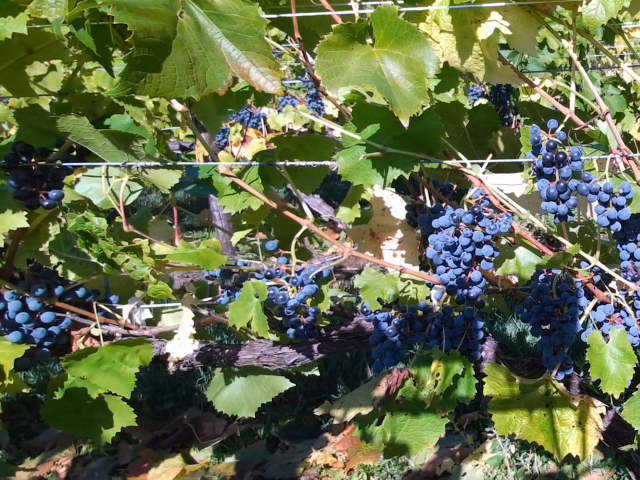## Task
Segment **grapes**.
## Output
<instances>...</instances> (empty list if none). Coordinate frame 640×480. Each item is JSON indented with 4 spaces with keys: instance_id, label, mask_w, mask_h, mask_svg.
<instances>
[{
    "instance_id": "obj_1",
    "label": "grapes",
    "mask_w": 640,
    "mask_h": 480,
    "mask_svg": "<svg viewBox=\"0 0 640 480\" xmlns=\"http://www.w3.org/2000/svg\"><path fill=\"white\" fill-rule=\"evenodd\" d=\"M490 206L491 202L487 197L479 201L478 205H473L470 211L455 209L451 205L443 208L441 203H434L431 216H417L422 234H430L441 228L437 234L428 237L430 248L426 250V255L429 260H433L435 266L432 276L441 281V286H447L450 295H457V304L464 303L467 307L484 306L480 295L481 288L486 285V280L479 271H474L470 281L465 282L464 273L471 266L472 254L482 257L480 267L484 272L491 271L494 260L500 257L499 249L493 245L492 236L509 232L510 223L513 222L511 213H502L499 219L485 216L482 207ZM461 221L465 225L482 228L474 231L472 227L461 226L462 233L458 237H451V231Z\"/></svg>"
},
{
    "instance_id": "obj_2",
    "label": "grapes",
    "mask_w": 640,
    "mask_h": 480,
    "mask_svg": "<svg viewBox=\"0 0 640 480\" xmlns=\"http://www.w3.org/2000/svg\"><path fill=\"white\" fill-rule=\"evenodd\" d=\"M425 314L424 319L430 324V332L427 339V349L431 350L434 346H438V350L442 351L444 347V329H445V352L449 353L452 349H457L460 338L465 330V321H471L469 329V337L472 340H462L460 349L469 348L468 357L472 361H477L481 357L480 340L484 337L482 330L484 321L480 317H475L472 309H465L462 315L449 316L452 313L451 307H444L441 313H433L430 305L426 301L418 303L415 306H408L406 303L400 305V313L404 314L403 318H393V314L389 310L374 309L370 303L363 302L359 306V312L363 318L373 324V331L370 334V341L374 344L372 355L376 360L373 363V369L377 373L399 364L401 354L405 350V343H424L426 333L423 332V323L418 318H414L411 322V332L407 333V323L409 317L416 312Z\"/></svg>"
},
{
    "instance_id": "obj_3",
    "label": "grapes",
    "mask_w": 640,
    "mask_h": 480,
    "mask_svg": "<svg viewBox=\"0 0 640 480\" xmlns=\"http://www.w3.org/2000/svg\"><path fill=\"white\" fill-rule=\"evenodd\" d=\"M552 275L547 273H537L530 282L531 297L524 301L523 305H518L515 309L517 314H521L520 321L530 324L529 334L535 338H540L538 349L542 354V365L549 372H554L559 362L561 366L554 374L556 380H562L565 375L571 376L574 372V363L569 355L564 351L553 353L555 345L561 344L564 348L571 346L575 336L584 329L583 322L579 320L584 315L582 306L589 307L591 300L584 296L586 291L582 289L583 283L576 281L573 286L574 296L568 291L572 284L570 277H566L563 284L559 286L560 297L552 298L550 285L555 276L560 273L559 268L551 269ZM568 302L567 312L561 314L558 319L552 317L554 309L561 308Z\"/></svg>"
},
{
    "instance_id": "obj_4",
    "label": "grapes",
    "mask_w": 640,
    "mask_h": 480,
    "mask_svg": "<svg viewBox=\"0 0 640 480\" xmlns=\"http://www.w3.org/2000/svg\"><path fill=\"white\" fill-rule=\"evenodd\" d=\"M541 128L538 125L530 127V143L532 150L526 154V159L530 163H534L536 169H541L543 175L553 177L556 169H559V177L564 180L558 182L550 181L547 178H539L536 181V188L540 197L544 200L541 203V209L548 214H556L553 217L555 224H560L564 220L572 222L574 215L570 211L578 205V199L571 191H577L580 196H586L588 203L598 201L599 203H607L610 200V194L614 192L612 183H604L602 189L597 182V177L588 171H583V161L581 160L582 149L573 146L570 150V158L565 152L551 153L558 149L555 140H547L545 147H542L543 137L540 135Z\"/></svg>"
},
{
    "instance_id": "obj_5",
    "label": "grapes",
    "mask_w": 640,
    "mask_h": 480,
    "mask_svg": "<svg viewBox=\"0 0 640 480\" xmlns=\"http://www.w3.org/2000/svg\"><path fill=\"white\" fill-rule=\"evenodd\" d=\"M33 296L18 295L7 291L0 302V333L6 334L13 343L34 344L41 347L39 357L48 361L52 357L51 348L54 339L69 330L72 321L68 317H59L53 311H41L39 299L47 294L43 284H35L31 288Z\"/></svg>"
},
{
    "instance_id": "obj_6",
    "label": "grapes",
    "mask_w": 640,
    "mask_h": 480,
    "mask_svg": "<svg viewBox=\"0 0 640 480\" xmlns=\"http://www.w3.org/2000/svg\"><path fill=\"white\" fill-rule=\"evenodd\" d=\"M318 270L315 264H309L305 268L296 270L294 276L288 277L284 274L282 269H265L259 268L258 273H250L249 277L258 279L261 282H270L272 279H280L288 282L293 287H303L302 291L297 292L294 297H290L286 292H280L277 286H270L268 288V297L276 304L283 305L284 318L282 324L285 327V336L289 339L299 338L300 342L308 341V338H315L320 336L318 329L313 328L314 323L317 322V315L320 313L319 307L309 306L306 308L305 318L308 321H299L297 308L304 305V301L309 296H314L319 292V285L312 284V279L309 278Z\"/></svg>"
},
{
    "instance_id": "obj_7",
    "label": "grapes",
    "mask_w": 640,
    "mask_h": 480,
    "mask_svg": "<svg viewBox=\"0 0 640 480\" xmlns=\"http://www.w3.org/2000/svg\"><path fill=\"white\" fill-rule=\"evenodd\" d=\"M622 193L612 196V203L617 208L607 209L604 204L595 206L596 224L609 228L613 238L618 240L617 249L621 262V276L629 282L637 283L640 268V247L636 243L640 239V213L631 214L627 206L629 199L634 197V188L628 181L619 184Z\"/></svg>"
},
{
    "instance_id": "obj_8",
    "label": "grapes",
    "mask_w": 640,
    "mask_h": 480,
    "mask_svg": "<svg viewBox=\"0 0 640 480\" xmlns=\"http://www.w3.org/2000/svg\"><path fill=\"white\" fill-rule=\"evenodd\" d=\"M611 315V320L602 325V332L609 334L616 329H624L628 334V339L633 346L640 344L639 328L636 326V319L630 316L628 310L619 309L615 313V307L611 304H600L592 311V317L598 322H603Z\"/></svg>"
},
{
    "instance_id": "obj_9",
    "label": "grapes",
    "mask_w": 640,
    "mask_h": 480,
    "mask_svg": "<svg viewBox=\"0 0 640 480\" xmlns=\"http://www.w3.org/2000/svg\"><path fill=\"white\" fill-rule=\"evenodd\" d=\"M101 292L97 288H89L86 290L83 286H78L73 291H68L64 295L65 302L84 308L85 310H91L93 303L99 300Z\"/></svg>"
},
{
    "instance_id": "obj_10",
    "label": "grapes",
    "mask_w": 640,
    "mask_h": 480,
    "mask_svg": "<svg viewBox=\"0 0 640 480\" xmlns=\"http://www.w3.org/2000/svg\"><path fill=\"white\" fill-rule=\"evenodd\" d=\"M240 295L241 292L234 287L226 286L224 292L217 296L216 303L218 305H227L232 300L236 301Z\"/></svg>"
},
{
    "instance_id": "obj_11",
    "label": "grapes",
    "mask_w": 640,
    "mask_h": 480,
    "mask_svg": "<svg viewBox=\"0 0 640 480\" xmlns=\"http://www.w3.org/2000/svg\"><path fill=\"white\" fill-rule=\"evenodd\" d=\"M204 275L206 277H214L220 281H230L234 278L235 273L230 269L215 268L214 270H206Z\"/></svg>"
},
{
    "instance_id": "obj_12",
    "label": "grapes",
    "mask_w": 640,
    "mask_h": 480,
    "mask_svg": "<svg viewBox=\"0 0 640 480\" xmlns=\"http://www.w3.org/2000/svg\"><path fill=\"white\" fill-rule=\"evenodd\" d=\"M64 292H65V287L61 283H55L51 287V293L55 297L62 296L64 294Z\"/></svg>"
},
{
    "instance_id": "obj_13",
    "label": "grapes",
    "mask_w": 640,
    "mask_h": 480,
    "mask_svg": "<svg viewBox=\"0 0 640 480\" xmlns=\"http://www.w3.org/2000/svg\"><path fill=\"white\" fill-rule=\"evenodd\" d=\"M108 301H109V303H110V304H112V305H117V304H119V303H120V301H121V296H120V294H119V293H117V292H112V293H110V294H109V296H108Z\"/></svg>"
}]
</instances>
